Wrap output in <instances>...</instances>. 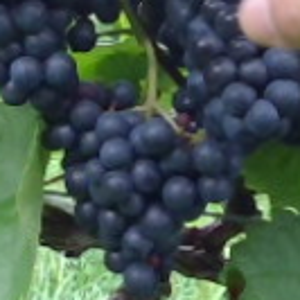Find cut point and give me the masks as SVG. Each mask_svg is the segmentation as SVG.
Segmentation results:
<instances>
[{"instance_id": "cut-point-1", "label": "cut point", "mask_w": 300, "mask_h": 300, "mask_svg": "<svg viewBox=\"0 0 300 300\" xmlns=\"http://www.w3.org/2000/svg\"><path fill=\"white\" fill-rule=\"evenodd\" d=\"M119 7L122 9L125 17L129 22V27L137 34L138 38L145 44L147 52V71H148V83L147 92L148 96L145 98L147 103L155 104L157 102V85H156V67L157 59L154 53V47L151 40L143 32L140 22L136 17V14L127 0H119Z\"/></svg>"}]
</instances>
